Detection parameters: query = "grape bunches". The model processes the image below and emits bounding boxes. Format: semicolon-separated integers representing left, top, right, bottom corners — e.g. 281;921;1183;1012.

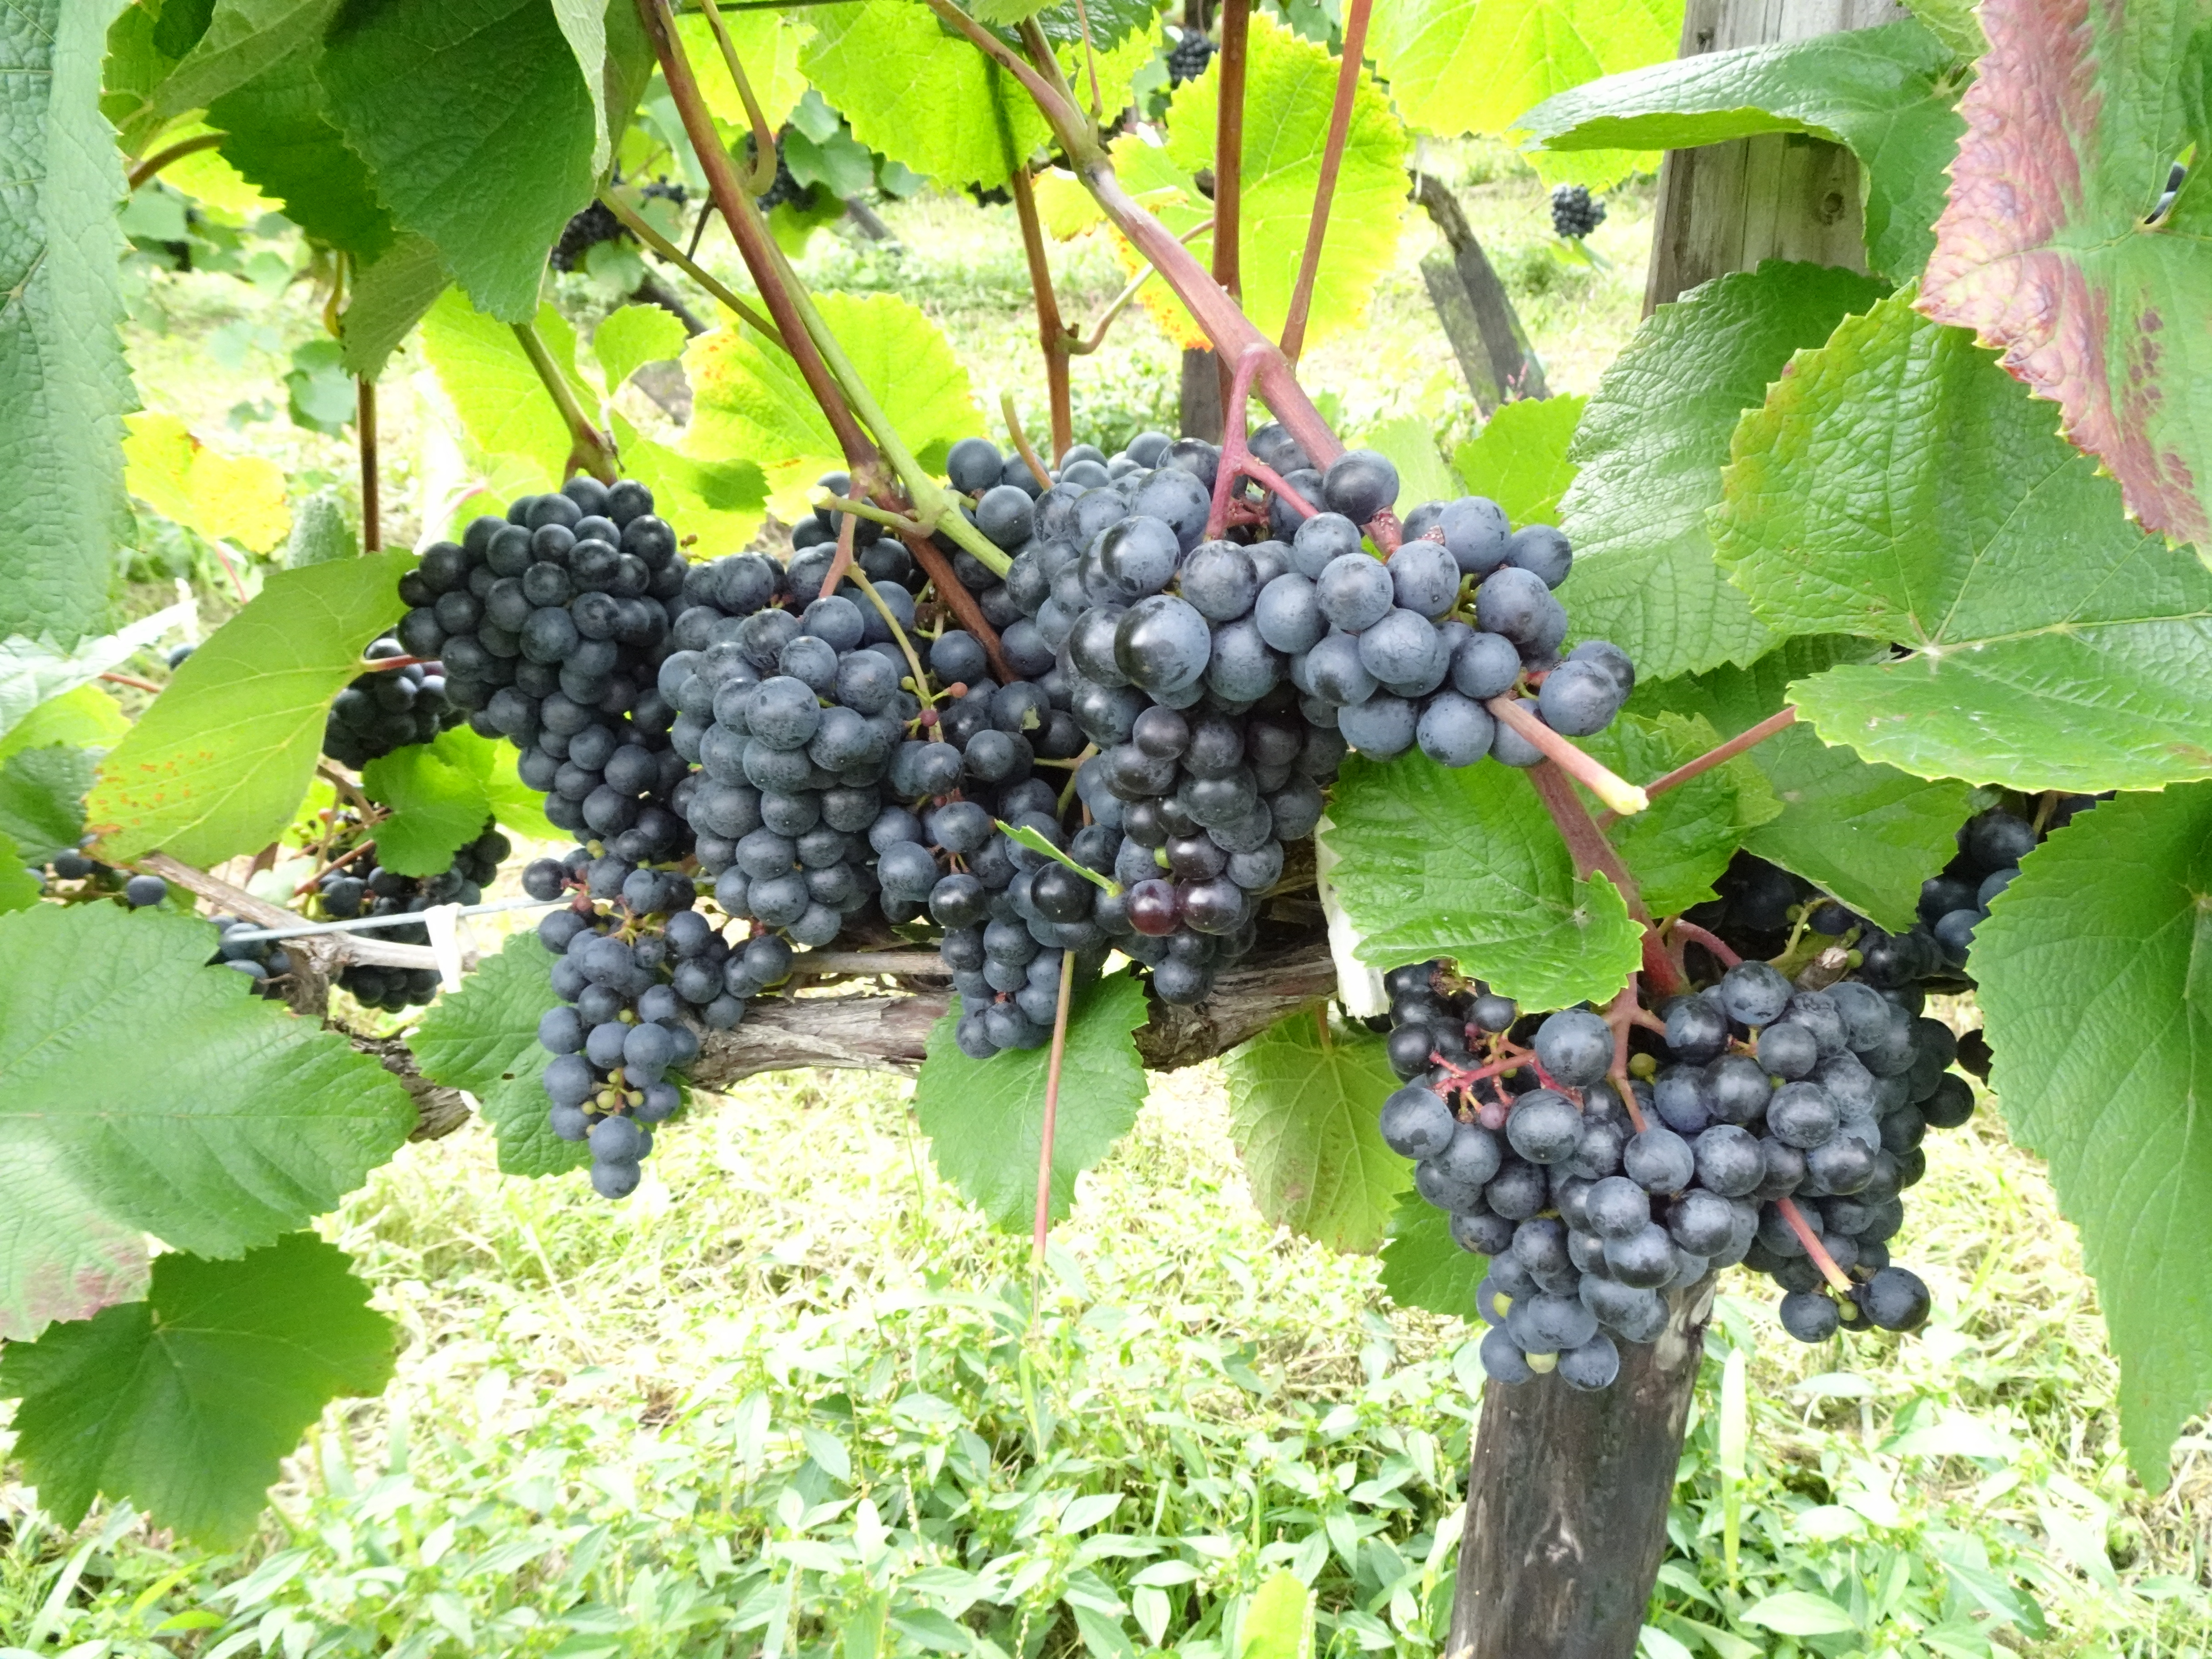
1920;792;2113;983
1008;422;1344;1004
324;627;467;770
790;473;911;584
869;729;1073;1059
906;437;1091;761
659;542;913;945
1665;960;1972;1340
1254;455;1635;767
29;836;166;907
397;475;698;865
1662;847;1941;1015
1380;961;1766;1390
204;915;292;999
1957;1021;1999;1097
168;647;197;673
522;829;793;1199
302;786;510;1013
